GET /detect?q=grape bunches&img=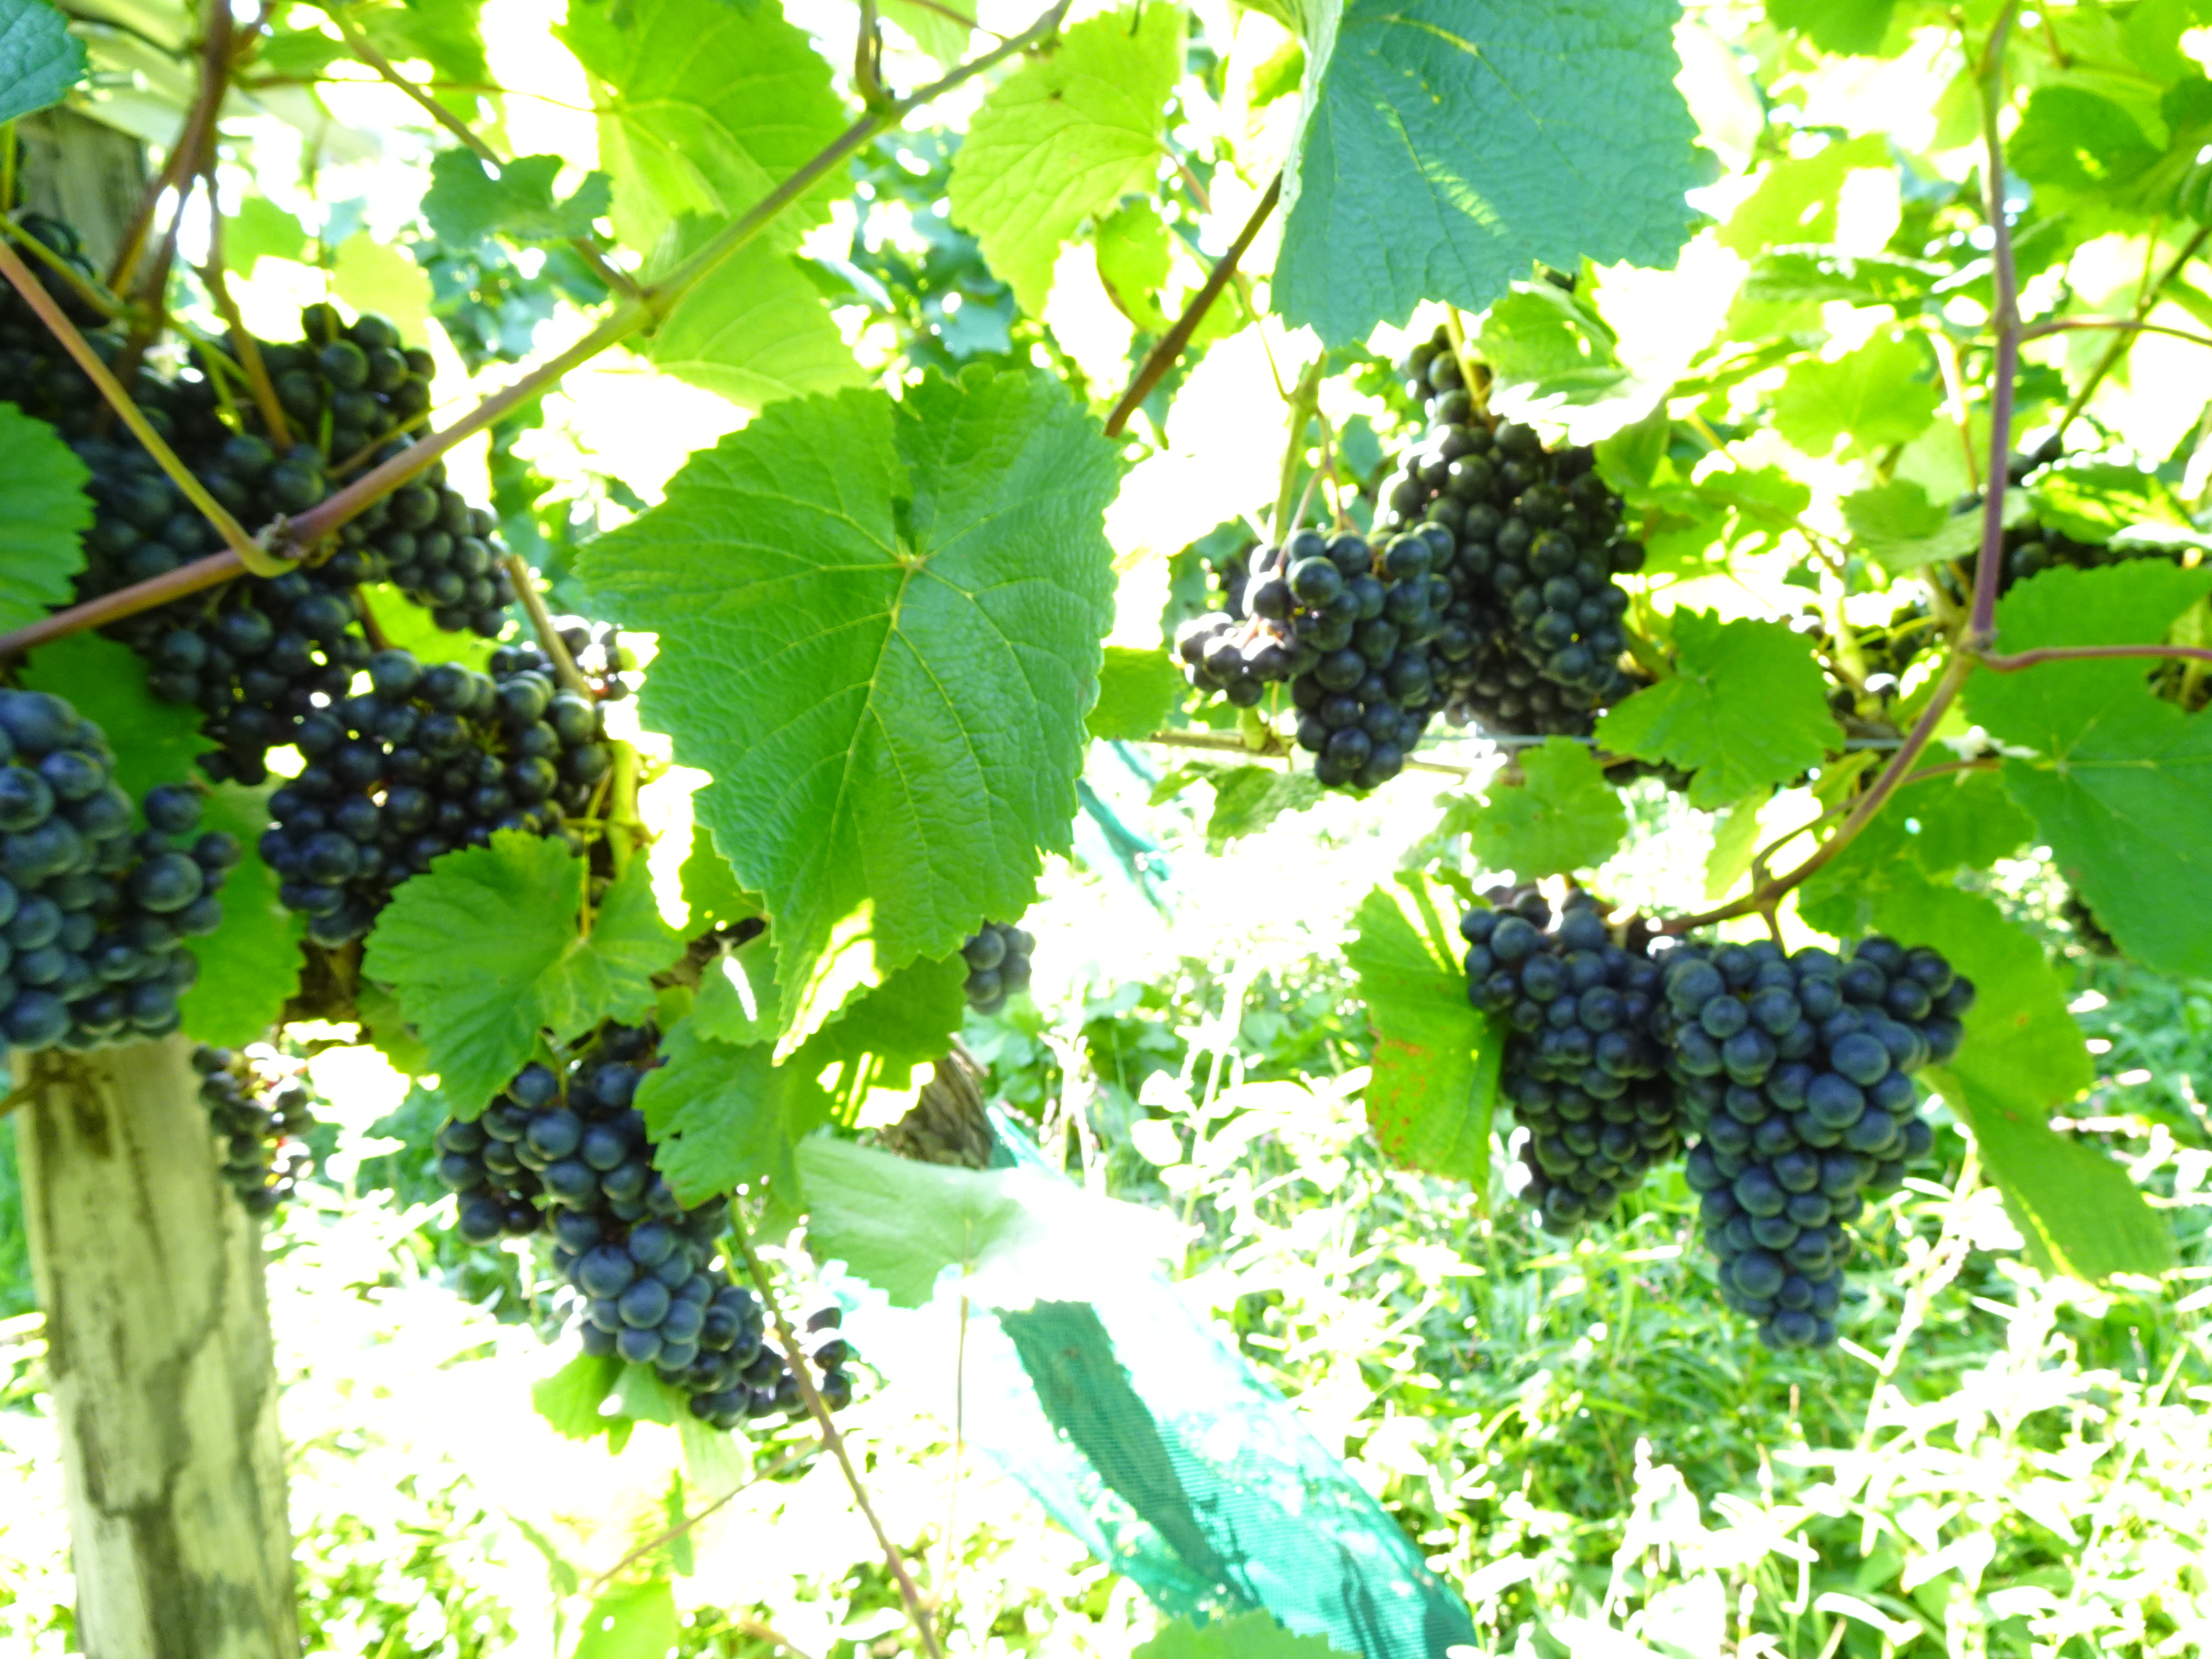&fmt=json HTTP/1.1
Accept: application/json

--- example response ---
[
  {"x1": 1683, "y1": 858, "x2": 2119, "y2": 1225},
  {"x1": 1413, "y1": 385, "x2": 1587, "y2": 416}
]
[
  {"x1": 61, "y1": 782, "x2": 240, "y2": 1050},
  {"x1": 1377, "y1": 420, "x2": 1653, "y2": 699},
  {"x1": 1955, "y1": 451, "x2": 2157, "y2": 601},
  {"x1": 189, "y1": 306, "x2": 519, "y2": 637},
  {"x1": 187, "y1": 1045, "x2": 311, "y2": 1220},
  {"x1": 1459, "y1": 884, "x2": 1686, "y2": 1240},
  {"x1": 493, "y1": 1016, "x2": 849, "y2": 1432},
  {"x1": 1603, "y1": 758, "x2": 1701, "y2": 791},
  {"x1": 0, "y1": 210, "x2": 128, "y2": 444},
  {"x1": 1446, "y1": 645, "x2": 1593, "y2": 757},
  {"x1": 1176, "y1": 613, "x2": 1287, "y2": 708},
  {"x1": 259, "y1": 652, "x2": 612, "y2": 949},
  {"x1": 438, "y1": 1093, "x2": 544, "y2": 1244},
  {"x1": 1242, "y1": 520, "x2": 1455, "y2": 785},
  {"x1": 960, "y1": 917, "x2": 1033, "y2": 1017},
  {"x1": 75, "y1": 366, "x2": 351, "y2": 784},
  {"x1": 1654, "y1": 935, "x2": 1975, "y2": 1349},
  {"x1": 1407, "y1": 325, "x2": 1489, "y2": 430},
  {"x1": 486, "y1": 617, "x2": 627, "y2": 711},
  {"x1": 0, "y1": 691, "x2": 135, "y2": 1050}
]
